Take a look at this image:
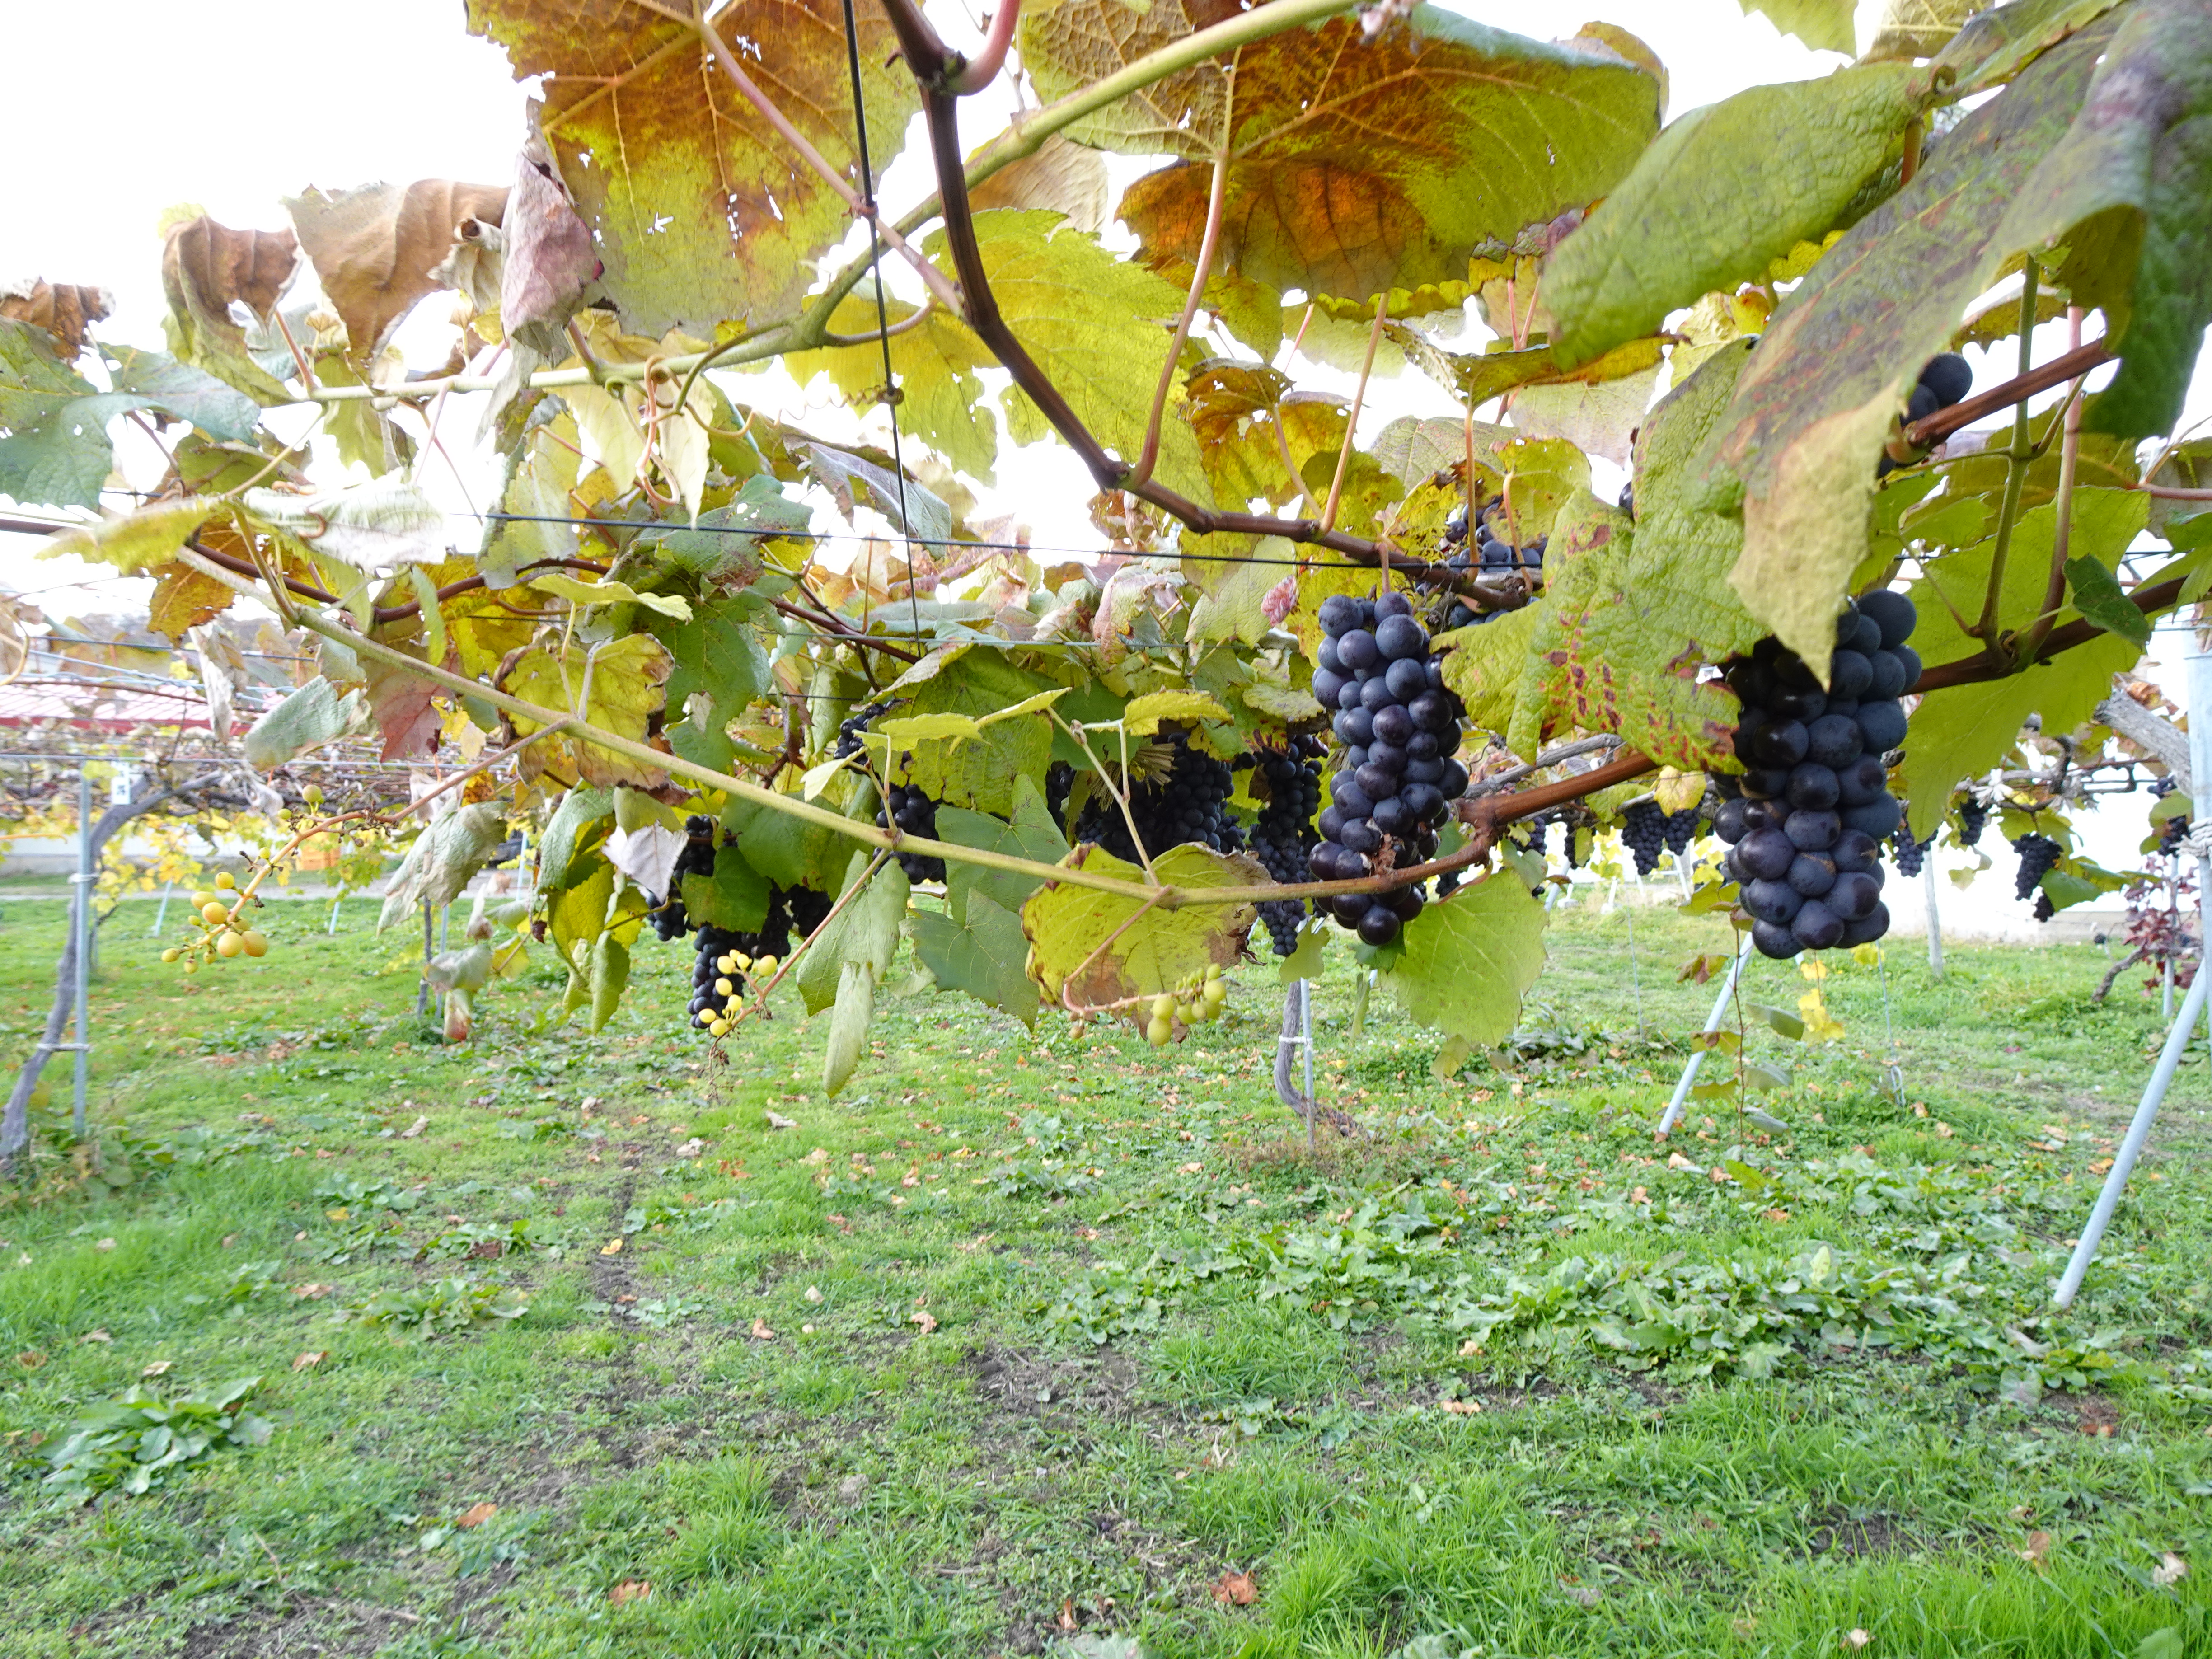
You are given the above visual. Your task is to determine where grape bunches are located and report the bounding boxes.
[681,810,736,881]
[1951,795,1997,850]
[1888,823,1940,888]
[2009,826,2066,901]
[276,782,373,851]
[790,873,835,938]
[1658,802,1701,863]
[1158,727,1245,859]
[871,789,948,890]
[1054,766,1156,861]
[747,873,796,975]
[1710,588,1926,961]
[1518,811,1550,899]
[2031,890,2070,925]
[160,872,270,979]
[832,699,889,761]
[1617,790,1666,881]
[1143,959,1230,1049]
[2146,766,2191,798]
[646,868,688,941]
[1612,441,1641,517]
[1443,500,1556,571]
[1559,799,1595,868]
[1414,580,1542,631]
[684,924,750,1052]
[697,944,779,1041]
[1244,730,1320,850]
[1247,845,1318,967]
[1306,589,1471,952]
[2153,814,2192,859]
[1862,346,1976,472]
